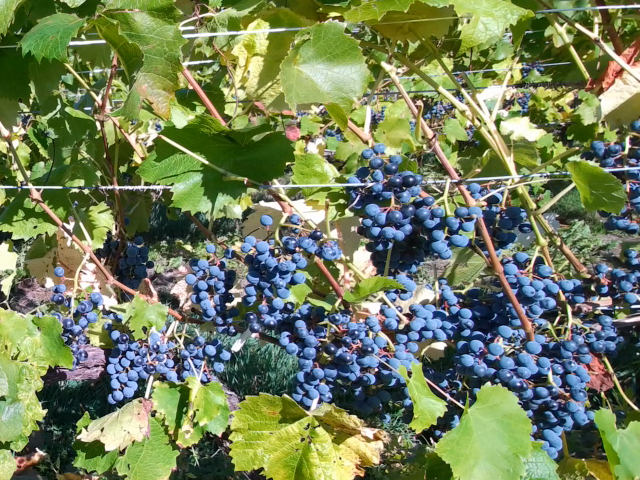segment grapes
<instances>
[{
  "mask_svg": "<svg viewBox=\"0 0 640 480\" xmlns=\"http://www.w3.org/2000/svg\"><path fill=\"white\" fill-rule=\"evenodd\" d=\"M184 369L180 372L181 378L185 379L189 375L194 374V369L187 359H191L192 364L200 369L202 361L207 358L209 363L213 367L215 373H222L224 371V363L233 358V353L226 347H221V341L219 339H212L209 342L205 340L203 335H198L194 339V344H189L187 349L180 351Z\"/></svg>",
  "mask_w": 640,
  "mask_h": 480,
  "instance_id": "83cd7487",
  "label": "grapes"
},
{
  "mask_svg": "<svg viewBox=\"0 0 640 480\" xmlns=\"http://www.w3.org/2000/svg\"><path fill=\"white\" fill-rule=\"evenodd\" d=\"M474 245H475L478 249H480V250L485 254V256H486V257H489V256H490V253H489V251H488L487 247H486V246H484V245H482V244H480V242H479L478 240H475V241H474Z\"/></svg>",
  "mask_w": 640,
  "mask_h": 480,
  "instance_id": "012428b0",
  "label": "grapes"
},
{
  "mask_svg": "<svg viewBox=\"0 0 640 480\" xmlns=\"http://www.w3.org/2000/svg\"><path fill=\"white\" fill-rule=\"evenodd\" d=\"M369 174H370V169L368 167L360 166L357 169V176H349L347 178V182L362 183L361 178H367Z\"/></svg>",
  "mask_w": 640,
  "mask_h": 480,
  "instance_id": "802abce8",
  "label": "grapes"
},
{
  "mask_svg": "<svg viewBox=\"0 0 640 480\" xmlns=\"http://www.w3.org/2000/svg\"><path fill=\"white\" fill-rule=\"evenodd\" d=\"M94 304L103 305L104 295L100 292H94L90 295V299H83L78 307H75L74 312H81L83 316L79 318L78 323L75 325V321L71 318L64 319L60 313H53L51 317H57L61 324H64V328L72 331L76 336V343L72 342L69 345L72 355L75 357L72 362L71 371L77 370V365L80 361H86L89 358V353L86 350H79V345H85L88 343V339L85 334H82V330L86 329L89 324H94L98 321V316L95 312H92Z\"/></svg>",
  "mask_w": 640,
  "mask_h": 480,
  "instance_id": "e5b3c951",
  "label": "grapes"
},
{
  "mask_svg": "<svg viewBox=\"0 0 640 480\" xmlns=\"http://www.w3.org/2000/svg\"><path fill=\"white\" fill-rule=\"evenodd\" d=\"M67 289V286L62 283H57L53 285V292L55 294L50 295V300L58 305H64L65 307L72 306V299L70 296H64V292Z\"/></svg>",
  "mask_w": 640,
  "mask_h": 480,
  "instance_id": "dcf779d0",
  "label": "grapes"
},
{
  "mask_svg": "<svg viewBox=\"0 0 640 480\" xmlns=\"http://www.w3.org/2000/svg\"><path fill=\"white\" fill-rule=\"evenodd\" d=\"M227 266L224 259H220L217 265H210L206 259H193L190 268L196 272L185 276V281L192 285L195 293L191 295L189 301L199 305L202 309L201 318L204 321H214L217 325V332L221 335L228 334L235 337L238 330L234 328V318L239 316V310L231 307L227 314V304L235 300V295L227 292L236 279V273L229 269L223 270ZM210 286L215 287L213 302L210 300L208 291Z\"/></svg>",
  "mask_w": 640,
  "mask_h": 480,
  "instance_id": "f8a65327",
  "label": "grapes"
},
{
  "mask_svg": "<svg viewBox=\"0 0 640 480\" xmlns=\"http://www.w3.org/2000/svg\"><path fill=\"white\" fill-rule=\"evenodd\" d=\"M629 193L631 198L626 202L627 206L620 211L621 215H627L631 211L640 213V184L632 182L629 185Z\"/></svg>",
  "mask_w": 640,
  "mask_h": 480,
  "instance_id": "91a60905",
  "label": "grapes"
},
{
  "mask_svg": "<svg viewBox=\"0 0 640 480\" xmlns=\"http://www.w3.org/2000/svg\"><path fill=\"white\" fill-rule=\"evenodd\" d=\"M629 272L620 271L617 268H609L605 264H599L595 268L596 283L594 290L602 297H610L614 288L610 284H617L619 291L623 292V298L628 303H636L640 299V255L634 248H628L624 252Z\"/></svg>",
  "mask_w": 640,
  "mask_h": 480,
  "instance_id": "5460f4e3",
  "label": "grapes"
},
{
  "mask_svg": "<svg viewBox=\"0 0 640 480\" xmlns=\"http://www.w3.org/2000/svg\"><path fill=\"white\" fill-rule=\"evenodd\" d=\"M396 279L407 287V292L403 293L398 288H389L384 292V295L390 302H395L397 299L401 301L410 300L415 288L417 287V283L410 275H407L406 273H399L396 276Z\"/></svg>",
  "mask_w": 640,
  "mask_h": 480,
  "instance_id": "ef6de9ee",
  "label": "grapes"
},
{
  "mask_svg": "<svg viewBox=\"0 0 640 480\" xmlns=\"http://www.w3.org/2000/svg\"><path fill=\"white\" fill-rule=\"evenodd\" d=\"M104 329L108 331V336L118 342L108 357L109 365L107 372L111 375L110 386L113 389L107 395L110 404H116L125 398L133 399L138 390V379L148 380L150 374L165 373V377L170 382H177L179 375L170 371L175 367V362L168 358L165 360L164 353L175 346L172 341L162 343L158 333L151 332L149 335L150 347H140L136 341H129V335L119 330H113V323L106 321L103 323ZM148 352L153 354L151 361L159 363L156 365L146 364Z\"/></svg>",
  "mask_w": 640,
  "mask_h": 480,
  "instance_id": "0513c4c2",
  "label": "grapes"
},
{
  "mask_svg": "<svg viewBox=\"0 0 640 480\" xmlns=\"http://www.w3.org/2000/svg\"><path fill=\"white\" fill-rule=\"evenodd\" d=\"M322 237L320 230H313L309 236H284L282 245L285 252L293 256L281 262L275 258V251L270 249L275 244L273 239L257 240L254 235H246L241 245L244 254L253 247L256 249L254 255L245 257L249 284L245 286L242 304L252 307L258 299L259 290L272 298L273 285L277 296L269 306L260 303L258 314L248 311L245 321L252 332H258L265 325L274 332L282 333L278 341L286 347V352L300 355L302 371L297 374L296 391L290 394L293 402L303 401L310 406L319 396L330 403L333 393L340 391V384L336 382L339 376L352 382V397L363 401L365 392L362 389L376 385L378 380L374 373H361L360 368L378 367V376L385 385L395 386L399 382L404 387L405 378L382 363L395 369L399 366L414 368L418 364V341L434 337L457 343L456 364L468 368L477 378L487 377L495 385L502 384L516 396L532 426V439L543 444L551 460H556L563 449L560 436L563 432L569 433L575 422L589 425L594 421L595 414L583 405L588 399L585 386L590 375L582 364L593 362L589 350L607 353L611 358L618 356V348L624 343L625 335L612 326L610 315L598 316L602 330L599 332L587 331L593 321L583 320L581 326H571V338L567 342L548 341L544 335H536L534 341H529L528 326L503 293L480 288H469L465 294L456 293L449 279L441 277L437 286L445 304L443 309L432 304L411 303L410 327L399 329L395 335L396 358L382 356L378 351L386 347V338L377 336L373 340L365 333L367 330L373 334L383 331L378 317L369 315L365 323L354 322L348 311L327 315L324 308L311 303H304L298 311L292 303H286L290 297V289L286 285L297 286L307 282L303 272L295 273L296 269L308 265V259L298 251L299 248L318 255L324 261H337L343 256L337 240L318 244ZM327 318L349 332L342 340L334 339L324 346L328 355L335 356L333 365L314 368V359L320 352L319 340L325 338L326 328H307L312 322ZM359 340L366 356L349 351V346ZM551 370L553 383L569 392L570 398L560 394L553 385L529 388L530 384L547 382V374Z\"/></svg>",
  "mask_w": 640,
  "mask_h": 480,
  "instance_id": "01657485",
  "label": "grapes"
},
{
  "mask_svg": "<svg viewBox=\"0 0 640 480\" xmlns=\"http://www.w3.org/2000/svg\"><path fill=\"white\" fill-rule=\"evenodd\" d=\"M527 260L526 252L515 251L511 258L502 260L501 267L507 275L520 309L530 319L533 328L542 331L546 327V321L541 314L556 309L557 302L553 297L558 295L559 290L564 292L565 298L574 304L586 301L588 292L584 281L580 278L562 279L558 285L554 283L550 280L552 269L547 264H542L538 268L542 281H531L527 277H521L517 264H524Z\"/></svg>",
  "mask_w": 640,
  "mask_h": 480,
  "instance_id": "84f90ec7",
  "label": "grapes"
},
{
  "mask_svg": "<svg viewBox=\"0 0 640 480\" xmlns=\"http://www.w3.org/2000/svg\"><path fill=\"white\" fill-rule=\"evenodd\" d=\"M627 148L625 141H620L618 144H609L605 146L603 140H593L591 142V149L594 151V156L597 159H602V164L605 167H615L617 160L613 157H617L622 150Z\"/></svg>",
  "mask_w": 640,
  "mask_h": 480,
  "instance_id": "2adb6a1f",
  "label": "grapes"
},
{
  "mask_svg": "<svg viewBox=\"0 0 640 480\" xmlns=\"http://www.w3.org/2000/svg\"><path fill=\"white\" fill-rule=\"evenodd\" d=\"M596 213L602 217H608L604 220V226L608 230H624L628 234H635L639 231V226L637 224H632L628 219L624 216H611L612 213L595 210Z\"/></svg>",
  "mask_w": 640,
  "mask_h": 480,
  "instance_id": "1ff8f66d",
  "label": "grapes"
},
{
  "mask_svg": "<svg viewBox=\"0 0 640 480\" xmlns=\"http://www.w3.org/2000/svg\"><path fill=\"white\" fill-rule=\"evenodd\" d=\"M377 154H385L387 146L383 142H376L374 150L363 148L361 150L362 158L365 161L371 160V167L376 169L372 173L374 186L372 192L376 194L379 200L389 201L392 196L397 198L399 203H408L411 197H416L412 201V205H404L400 210H392L384 212L382 207L369 197H361L357 204L353 205L354 209H364V215L367 218L362 220V225L357 229V234L361 238H366L365 249L370 252H384L394 247L393 238L396 241H404L407 236L414 233V225L412 222L417 220L423 223L424 229L431 232V239L434 241L430 244V251L434 255H438L443 260H449L453 257L454 247L466 248L471 245V237L469 235L455 234L446 238V233L442 230L445 225L449 227L452 233L463 231H473L477 219L482 218L485 221L486 230L491 238H495L499 242V246L494 245L496 256L501 257L502 252L510 250L517 236L513 230L517 225L519 231L523 234H531L533 232L530 223L525 220L528 216L525 208H518L516 205L506 206L501 212L499 226L501 228L493 229L492 225L496 221V214L500 212L498 207L502 203L504 192L499 190L492 193L487 198L486 210L480 207L458 206L456 215L458 217H447L445 220V211L441 206H434L435 198L433 196H418L420 194L421 181L423 177L416 175L409 170L399 172V166L403 163L400 154H392L389 157V163L385 165V173L392 175L390 181H385V174L382 168L384 160L381 157H375Z\"/></svg>",
  "mask_w": 640,
  "mask_h": 480,
  "instance_id": "b958b902",
  "label": "grapes"
},
{
  "mask_svg": "<svg viewBox=\"0 0 640 480\" xmlns=\"http://www.w3.org/2000/svg\"><path fill=\"white\" fill-rule=\"evenodd\" d=\"M402 311L403 307L401 305L396 307V311L390 309L386 303H382L380 305V312L385 317L384 323L387 331L394 332L398 329L400 320L398 313H401Z\"/></svg>",
  "mask_w": 640,
  "mask_h": 480,
  "instance_id": "54f908b8",
  "label": "grapes"
}]
</instances>
